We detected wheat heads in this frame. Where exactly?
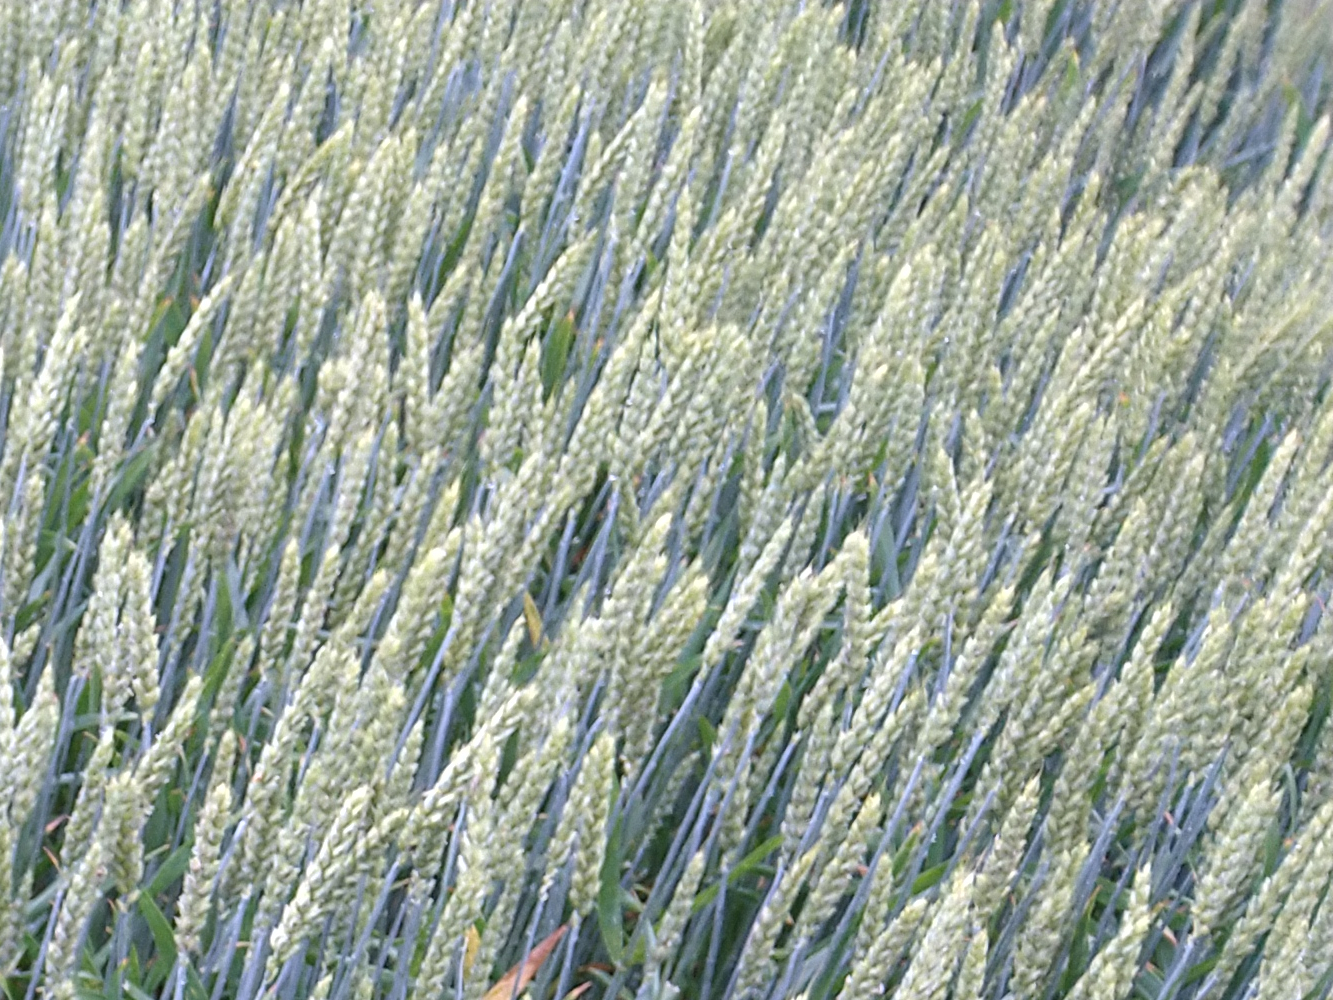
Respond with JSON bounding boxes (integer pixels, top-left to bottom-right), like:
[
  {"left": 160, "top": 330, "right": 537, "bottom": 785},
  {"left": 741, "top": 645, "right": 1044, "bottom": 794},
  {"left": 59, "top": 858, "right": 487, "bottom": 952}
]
[
  {"left": 334, "top": 0, "right": 354, "bottom": 89},
  {"left": 612, "top": 94, "right": 665, "bottom": 222},
  {"left": 1033, "top": 40, "right": 1075, "bottom": 103},
  {"left": 993, "top": 755, "right": 1020, "bottom": 831},
  {"left": 717, "top": 629, "right": 771, "bottom": 744},
  {"left": 191, "top": 415, "right": 224, "bottom": 528},
  {"left": 542, "top": 751, "right": 596, "bottom": 874},
  {"left": 971, "top": 56, "right": 1010, "bottom": 175},
  {"left": 854, "top": 134, "right": 900, "bottom": 218},
  {"left": 77, "top": 0, "right": 93, "bottom": 40},
  {"left": 61, "top": 733, "right": 113, "bottom": 865},
  {"left": 1310, "top": 261, "right": 1333, "bottom": 308},
  {"left": 397, "top": 699, "right": 527, "bottom": 848},
  {"left": 426, "top": 352, "right": 482, "bottom": 440},
  {"left": 705, "top": 522, "right": 793, "bottom": 660},
  {"left": 1007, "top": 157, "right": 1058, "bottom": 249},
  {"left": 879, "top": 743, "right": 923, "bottom": 826},
  {"left": 53, "top": 42, "right": 77, "bottom": 94},
  {"left": 738, "top": 462, "right": 786, "bottom": 568},
  {"left": 902, "top": 255, "right": 932, "bottom": 348},
  {"left": 1050, "top": 90, "right": 1078, "bottom": 156},
  {"left": 918, "top": 595, "right": 1015, "bottom": 745},
  {"left": 457, "top": 329, "right": 490, "bottom": 411},
  {"left": 880, "top": 150, "right": 950, "bottom": 244},
  {"left": 960, "top": 409, "right": 988, "bottom": 486},
  {"left": 35, "top": 90, "right": 70, "bottom": 205},
  {"left": 0, "top": 876, "right": 36, "bottom": 970},
  {"left": 513, "top": 249, "right": 579, "bottom": 336},
  {"left": 686, "top": 476, "right": 713, "bottom": 528},
  {"left": 1201, "top": 192, "right": 1260, "bottom": 254},
  {"left": 652, "top": 559, "right": 703, "bottom": 626},
  {"left": 251, "top": 827, "right": 307, "bottom": 945},
  {"left": 958, "top": 765, "right": 991, "bottom": 853},
  {"left": 1167, "top": 273, "right": 1223, "bottom": 407},
  {"left": 589, "top": 0, "right": 635, "bottom": 86},
  {"left": 260, "top": 543, "right": 300, "bottom": 668},
  {"left": 854, "top": 101, "right": 886, "bottom": 145},
  {"left": 637, "top": 556, "right": 668, "bottom": 617},
  {"left": 327, "top": 510, "right": 386, "bottom": 619},
  {"left": 848, "top": 241, "right": 877, "bottom": 340},
  {"left": 129, "top": 271, "right": 161, "bottom": 338},
  {"left": 870, "top": 106, "right": 903, "bottom": 156},
  {"left": 632, "top": 114, "right": 700, "bottom": 246},
  {"left": 884, "top": 40, "right": 900, "bottom": 88},
  {"left": 498, "top": 484, "right": 569, "bottom": 601},
  {"left": 1142, "top": 0, "right": 1163, "bottom": 53},
  {"left": 0, "top": 262, "right": 16, "bottom": 373},
  {"left": 1258, "top": 0, "right": 1314, "bottom": 101},
  {"left": 41, "top": 789, "right": 127, "bottom": 991},
  {"left": 745, "top": 577, "right": 810, "bottom": 698},
  {"left": 1007, "top": 266, "right": 1062, "bottom": 361},
  {"left": 1095, "top": 441, "right": 1166, "bottom": 534},
  {"left": 1041, "top": 920, "right": 1150, "bottom": 1000},
  {"left": 918, "top": 402, "right": 943, "bottom": 487},
  {"left": 592, "top": 234, "right": 629, "bottom": 339},
  {"left": 997, "top": 637, "right": 1088, "bottom": 750},
  {"left": 169, "top": 528, "right": 198, "bottom": 637},
  {"left": 676, "top": 420, "right": 713, "bottom": 492},
  {"left": 150, "top": 280, "right": 230, "bottom": 400},
  {"left": 104, "top": 100, "right": 123, "bottom": 184},
  {"left": 198, "top": 46, "right": 210, "bottom": 134},
  {"left": 1307, "top": 235, "right": 1331, "bottom": 274},
  {"left": 484, "top": 248, "right": 504, "bottom": 321},
  {"left": 882, "top": 371, "right": 925, "bottom": 490},
  {"left": 359, "top": 329, "right": 391, "bottom": 425},
  {"left": 695, "top": 38, "right": 745, "bottom": 134},
  {"left": 11, "top": 480, "right": 44, "bottom": 599},
  {"left": 905, "top": 762, "right": 940, "bottom": 816},
  {"left": 350, "top": 810, "right": 412, "bottom": 861},
  {"left": 937, "top": 213, "right": 955, "bottom": 241},
  {"left": 427, "top": 22, "right": 450, "bottom": 84},
  {"left": 1109, "top": 0, "right": 1153, "bottom": 83},
  {"left": 42, "top": 0, "right": 62, "bottom": 56},
  {"left": 1029, "top": 412, "right": 1090, "bottom": 514},
  {"left": 1283, "top": 344, "right": 1322, "bottom": 427},
  {"left": 1115, "top": 763, "right": 1151, "bottom": 821},
  {"left": 371, "top": 552, "right": 445, "bottom": 672},
  {"left": 1266, "top": 602, "right": 1306, "bottom": 655},
  {"left": 512, "top": 0, "right": 543, "bottom": 87},
  {"left": 1089, "top": 0, "right": 1133, "bottom": 69},
  {"left": 1153, "top": 176, "right": 1175, "bottom": 234},
  {"left": 523, "top": 90, "right": 579, "bottom": 215},
  {"left": 299, "top": 0, "right": 316, "bottom": 34},
  {"left": 381, "top": 723, "right": 425, "bottom": 817},
  {"left": 1123, "top": 310, "right": 1173, "bottom": 446},
  {"left": 32, "top": 330, "right": 87, "bottom": 475},
  {"left": 312, "top": 659, "right": 360, "bottom": 835},
  {"left": 160, "top": 0, "right": 171, "bottom": 63},
  {"left": 1199, "top": 707, "right": 1286, "bottom": 838},
  {"left": 113, "top": 778, "right": 140, "bottom": 882},
  {"left": 380, "top": 228, "right": 426, "bottom": 323},
  {"left": 935, "top": 149, "right": 966, "bottom": 200},
  {"left": 324, "top": 874, "right": 359, "bottom": 957},
  {"left": 219, "top": 259, "right": 263, "bottom": 363},
  {"left": 457, "top": 267, "right": 485, "bottom": 356},
  {"left": 1148, "top": 54, "right": 1189, "bottom": 152},
  {"left": 788, "top": 250, "right": 850, "bottom": 390},
  {"left": 843, "top": 52, "right": 858, "bottom": 93},
  {"left": 152, "top": 184, "right": 177, "bottom": 245},
  {"left": 787, "top": 8, "right": 842, "bottom": 119},
  {"left": 1185, "top": 673, "right": 1223, "bottom": 772},
  {"left": 927, "top": 271, "right": 983, "bottom": 406},
  {"left": 266, "top": 791, "right": 371, "bottom": 967},
  {"left": 426, "top": 268, "right": 467, "bottom": 336},
  {"left": 345, "top": 694, "right": 406, "bottom": 789},
  {"left": 857, "top": 145, "right": 910, "bottom": 233},
  {"left": 571, "top": 14, "right": 607, "bottom": 83},
  {"left": 991, "top": 237, "right": 1082, "bottom": 351},
  {"left": 781, "top": 706, "right": 835, "bottom": 858},
  {"left": 1216, "top": 84, "right": 1243, "bottom": 152},
  {"left": 922, "top": 487, "right": 992, "bottom": 629},
  {"left": 270, "top": 132, "right": 346, "bottom": 221},
  {"left": 115, "top": 0, "right": 149, "bottom": 95},
  {"left": 444, "top": 513, "right": 481, "bottom": 681},
  {"left": 569, "top": 740, "right": 615, "bottom": 910},
  {"left": 1139, "top": 462, "right": 1204, "bottom": 583},
  {"left": 950, "top": 0, "right": 977, "bottom": 107},
  {"left": 709, "top": 381, "right": 753, "bottom": 475},
  {"left": 1196, "top": 360, "right": 1227, "bottom": 443},
  {"left": 1269, "top": 112, "right": 1330, "bottom": 230},
  {"left": 479, "top": 326, "right": 514, "bottom": 459},
  {"left": 1094, "top": 0, "right": 1110, "bottom": 31},
  {"left": 478, "top": 67, "right": 500, "bottom": 132},
  {"left": 460, "top": 879, "right": 523, "bottom": 1000},
  {"left": 474, "top": 0, "right": 513, "bottom": 78},
  {"left": 1041, "top": 331, "right": 1084, "bottom": 410},
  {"left": 1236, "top": 105, "right": 1256, "bottom": 143},
  {"left": 91, "top": 0, "right": 119, "bottom": 71},
  {"left": 1084, "top": 510, "right": 1143, "bottom": 611},
  {"left": 421, "top": 484, "right": 460, "bottom": 557},
  {"left": 1191, "top": 187, "right": 1231, "bottom": 266},
  {"left": 439, "top": 117, "right": 471, "bottom": 209},
  {"left": 919, "top": 70, "right": 949, "bottom": 154},
  {"left": 0, "top": 637, "right": 15, "bottom": 751},
  {"left": 831, "top": 634, "right": 917, "bottom": 774},
  {"left": 1066, "top": 100, "right": 1095, "bottom": 167},
  {"left": 26, "top": 197, "right": 58, "bottom": 353},
  {"left": 911, "top": 59, "right": 941, "bottom": 119},
  {"left": 134, "top": 213, "right": 148, "bottom": 265},
  {"left": 1070, "top": 423, "right": 1118, "bottom": 547},
  {"left": 1151, "top": 86, "right": 1201, "bottom": 172},
  {"left": 950, "top": 233, "right": 995, "bottom": 328},
  {"left": 1023, "top": 101, "right": 1047, "bottom": 137},
  {"left": 1093, "top": 102, "right": 1127, "bottom": 174},
  {"left": 841, "top": 368, "right": 867, "bottom": 476},
  {"left": 885, "top": 58, "right": 905, "bottom": 95},
  {"left": 340, "top": 309, "right": 355, "bottom": 364},
  {"left": 1138, "top": 203, "right": 1198, "bottom": 296},
  {"left": 131, "top": 682, "right": 200, "bottom": 790},
  {"left": 302, "top": 364, "right": 345, "bottom": 455},
  {"left": 1172, "top": 504, "right": 1233, "bottom": 603},
  {"left": 177, "top": 786, "right": 232, "bottom": 950},
  {"left": 290, "top": 404, "right": 350, "bottom": 541},
  {"left": 828, "top": 89, "right": 858, "bottom": 138},
  {"left": 209, "top": 731, "right": 237, "bottom": 795},
  {"left": 405, "top": 297, "right": 430, "bottom": 443},
  {"left": 1021, "top": 0, "right": 1048, "bottom": 42},
  {"left": 1184, "top": 314, "right": 1243, "bottom": 429},
  {"left": 1205, "top": 436, "right": 1227, "bottom": 500},
  {"left": 647, "top": 754, "right": 698, "bottom": 835},
  {"left": 326, "top": 144, "right": 392, "bottom": 274},
  {"left": 1108, "top": 664, "right": 1153, "bottom": 797},
  {"left": 740, "top": 404, "right": 767, "bottom": 525},
  {"left": 1067, "top": 174, "right": 1101, "bottom": 235},
  {"left": 226, "top": 167, "right": 268, "bottom": 268},
  {"left": 1065, "top": 303, "right": 1145, "bottom": 402},
  {"left": 385, "top": 456, "right": 437, "bottom": 559},
  {"left": 340, "top": 405, "right": 363, "bottom": 482},
  {"left": 583, "top": 101, "right": 655, "bottom": 196},
  {"left": 443, "top": 143, "right": 482, "bottom": 238},
  {"left": 854, "top": 857, "right": 893, "bottom": 962},
  {"left": 1160, "top": 659, "right": 1188, "bottom": 708},
  {"left": 701, "top": 326, "right": 740, "bottom": 378},
  {"left": 948, "top": 255, "right": 1009, "bottom": 402},
  {"left": 81, "top": 76, "right": 118, "bottom": 172},
  {"left": 1004, "top": 534, "right": 1041, "bottom": 586},
  {"left": 37, "top": 879, "right": 96, "bottom": 1000},
  {"left": 900, "top": 137, "right": 934, "bottom": 203},
  {"left": 558, "top": 620, "right": 607, "bottom": 713},
  {"left": 216, "top": 0, "right": 250, "bottom": 80},
  {"left": 371, "top": 424, "right": 400, "bottom": 516},
  {"left": 216, "top": 0, "right": 229, "bottom": 46},
  {"left": 970, "top": 572, "right": 1049, "bottom": 733},
  {"left": 872, "top": 5, "right": 886, "bottom": 60},
  {"left": 912, "top": 7, "right": 926, "bottom": 64},
  {"left": 84, "top": 0, "right": 106, "bottom": 41},
  {"left": 289, "top": 51, "right": 310, "bottom": 109},
  {"left": 354, "top": 75, "right": 380, "bottom": 156},
  {"left": 930, "top": 0, "right": 949, "bottom": 56},
  {"left": 1178, "top": 5, "right": 1200, "bottom": 52},
  {"left": 66, "top": 0, "right": 83, "bottom": 42},
  {"left": 1110, "top": 607, "right": 1173, "bottom": 715},
  {"left": 765, "top": 290, "right": 815, "bottom": 371},
  {"left": 802, "top": 138, "right": 835, "bottom": 184},
  {"left": 1205, "top": 882, "right": 1325, "bottom": 1000},
  {"left": 985, "top": 363, "right": 999, "bottom": 414},
  {"left": 950, "top": 54, "right": 977, "bottom": 132},
  {"left": 223, "top": 742, "right": 279, "bottom": 902},
  {"left": 69, "top": 146, "right": 101, "bottom": 271},
  {"left": 18, "top": 85, "right": 51, "bottom": 201},
  {"left": 217, "top": 91, "right": 287, "bottom": 222},
  {"left": 247, "top": 59, "right": 279, "bottom": 138},
  {"left": 798, "top": 607, "right": 898, "bottom": 721},
  {"left": 486, "top": 736, "right": 566, "bottom": 867},
  {"left": 1052, "top": 419, "right": 1105, "bottom": 544},
  {"left": 387, "top": 185, "right": 424, "bottom": 290},
  {"left": 1112, "top": 877, "right": 1153, "bottom": 999},
  {"left": 256, "top": 10, "right": 286, "bottom": 73},
  {"left": 106, "top": 605, "right": 130, "bottom": 714},
  {"left": 996, "top": 313, "right": 1057, "bottom": 444},
  {"left": 668, "top": 340, "right": 747, "bottom": 455},
  {"left": 1251, "top": 971, "right": 1301, "bottom": 1000},
  {"left": 308, "top": 0, "right": 330, "bottom": 52},
  {"left": 144, "top": 62, "right": 164, "bottom": 156},
  {"left": 1253, "top": 689, "right": 1314, "bottom": 786},
  {"left": 647, "top": 854, "right": 706, "bottom": 971},
  {"left": 321, "top": 649, "right": 335, "bottom": 669},
  {"left": 735, "top": 851, "right": 815, "bottom": 990},
  {"left": 1014, "top": 207, "right": 1062, "bottom": 304},
  {"left": 345, "top": 674, "right": 390, "bottom": 765},
  {"left": 1285, "top": 416, "right": 1333, "bottom": 516},
  {"left": 97, "top": 528, "right": 122, "bottom": 680},
  {"left": 389, "top": 362, "right": 413, "bottom": 397},
  {"left": 1232, "top": 812, "right": 1331, "bottom": 956},
  {"left": 1168, "top": 492, "right": 1201, "bottom": 575},
  {"left": 873, "top": 0, "right": 908, "bottom": 62},
  {"left": 825, "top": 695, "right": 921, "bottom": 825},
  {"left": 974, "top": 97, "right": 1025, "bottom": 197},
  {"left": 740, "top": 4, "right": 764, "bottom": 78},
  {"left": 0, "top": 438, "right": 21, "bottom": 512},
  {"left": 1161, "top": 223, "right": 1195, "bottom": 285},
  {"left": 358, "top": 4, "right": 390, "bottom": 69},
  {"left": 614, "top": 339, "right": 656, "bottom": 472},
  {"left": 1228, "top": 601, "right": 1268, "bottom": 669},
  {"left": 973, "top": 777, "right": 1041, "bottom": 926},
  {"left": 685, "top": 2, "right": 704, "bottom": 104},
  {"left": 1147, "top": 451, "right": 1178, "bottom": 515},
  {"left": 620, "top": 681, "right": 662, "bottom": 773},
  {"left": 137, "top": 465, "right": 174, "bottom": 549},
  {"left": 892, "top": 59, "right": 918, "bottom": 97},
  {"left": 411, "top": 877, "right": 484, "bottom": 1000},
  {"left": 0, "top": 875, "right": 16, "bottom": 964},
  {"left": 963, "top": 167, "right": 1009, "bottom": 250},
  {"left": 851, "top": 355, "right": 909, "bottom": 466},
  {"left": 544, "top": 382, "right": 577, "bottom": 458},
  {"left": 1116, "top": 106, "right": 1150, "bottom": 176},
  {"left": 920, "top": 256, "right": 946, "bottom": 322},
  {"left": 254, "top": 225, "right": 296, "bottom": 355},
  {"left": 113, "top": 224, "right": 140, "bottom": 302},
  {"left": 416, "top": 150, "right": 446, "bottom": 232},
  {"left": 1238, "top": 258, "right": 1278, "bottom": 354},
  {"left": 387, "top": 534, "right": 460, "bottom": 664},
  {"left": 781, "top": 486, "right": 826, "bottom": 583},
  {"left": 131, "top": 560, "right": 160, "bottom": 712},
  {"left": 335, "top": 291, "right": 379, "bottom": 413},
  {"left": 566, "top": 349, "right": 626, "bottom": 484},
  {"left": 10, "top": 667, "right": 60, "bottom": 822},
  {"left": 335, "top": 52, "right": 358, "bottom": 126},
  {"left": 207, "top": 639, "right": 254, "bottom": 742},
  {"left": 802, "top": 166, "right": 885, "bottom": 282},
  {"left": 748, "top": 723, "right": 785, "bottom": 798},
  {"left": 985, "top": 134, "right": 1024, "bottom": 213},
  {"left": 1281, "top": 647, "right": 1311, "bottom": 688},
  {"left": 17, "top": 0, "right": 36, "bottom": 68},
  {"left": 287, "top": 232, "right": 306, "bottom": 306},
  {"left": 407, "top": 0, "right": 435, "bottom": 79},
  {"left": 169, "top": 416, "right": 206, "bottom": 532},
  {"left": 76, "top": 225, "right": 113, "bottom": 335},
  {"left": 566, "top": 137, "right": 602, "bottom": 240},
  {"left": 385, "top": 131, "right": 419, "bottom": 248},
  {"left": 176, "top": 66, "right": 202, "bottom": 177},
  {"left": 1123, "top": 304, "right": 1165, "bottom": 377},
  {"left": 653, "top": 6, "right": 682, "bottom": 77},
  {"left": 0, "top": 264, "right": 30, "bottom": 395},
  {"left": 460, "top": 744, "right": 499, "bottom": 899},
  {"left": 420, "top": 45, "right": 460, "bottom": 124},
  {"left": 690, "top": 211, "right": 737, "bottom": 303},
  {"left": 950, "top": 515, "right": 983, "bottom": 644},
  {"left": 811, "top": 51, "right": 842, "bottom": 128},
  {"left": 380, "top": 19, "right": 404, "bottom": 79},
  {"left": 1270, "top": 496, "right": 1332, "bottom": 601},
  {"left": 1223, "top": 433, "right": 1297, "bottom": 566},
  {"left": 1013, "top": 591, "right": 1057, "bottom": 711},
  {"left": 314, "top": 167, "right": 346, "bottom": 245},
  {"left": 1201, "top": 12, "right": 1244, "bottom": 122},
  {"left": 542, "top": 46, "right": 567, "bottom": 120},
  {"left": 247, "top": 458, "right": 290, "bottom": 575},
  {"left": 330, "top": 436, "right": 374, "bottom": 540},
  {"left": 1037, "top": 680, "right": 1102, "bottom": 753},
  {"left": 1016, "top": 398, "right": 1066, "bottom": 496},
  {"left": 797, "top": 798, "right": 882, "bottom": 936},
  {"left": 247, "top": 0, "right": 270, "bottom": 64},
  {"left": 913, "top": 936, "right": 961, "bottom": 1000},
  {"left": 429, "top": 6, "right": 473, "bottom": 89},
  {"left": 938, "top": 933, "right": 989, "bottom": 1000},
  {"left": 950, "top": 194, "right": 970, "bottom": 243},
  {"left": 644, "top": 340, "right": 693, "bottom": 423},
  {"left": 738, "top": 274, "right": 789, "bottom": 381},
  {"left": 1191, "top": 781, "right": 1267, "bottom": 932},
  {"left": 6, "top": 330, "right": 35, "bottom": 427},
  {"left": 749, "top": 634, "right": 813, "bottom": 723},
  {"left": 937, "top": 248, "right": 962, "bottom": 322},
  {"left": 1134, "top": 220, "right": 1166, "bottom": 258},
  {"left": 883, "top": 537, "right": 940, "bottom": 658},
  {"left": 384, "top": 39, "right": 401, "bottom": 120},
  {"left": 560, "top": 247, "right": 591, "bottom": 309},
  {"left": 0, "top": 626, "right": 42, "bottom": 713},
  {"left": 849, "top": 954, "right": 934, "bottom": 1000},
  {"left": 847, "top": 538, "right": 871, "bottom": 642},
  {"left": 67, "top": 190, "right": 106, "bottom": 289},
  {"left": 642, "top": 584, "right": 707, "bottom": 672},
  {"left": 25, "top": 300, "right": 81, "bottom": 448},
  {"left": 224, "top": 362, "right": 266, "bottom": 448},
  {"left": 937, "top": 56, "right": 959, "bottom": 109},
  {"left": 156, "top": 89, "right": 185, "bottom": 189},
  {"left": 598, "top": 522, "right": 669, "bottom": 648},
  {"left": 623, "top": 612, "right": 701, "bottom": 721},
  {"left": 921, "top": 186, "right": 948, "bottom": 230},
  {"left": 861, "top": 0, "right": 878, "bottom": 53},
  {"left": 636, "top": 5, "right": 666, "bottom": 62},
  {"left": 759, "top": 18, "right": 802, "bottom": 126},
  {"left": 779, "top": 111, "right": 808, "bottom": 185},
  {"left": 0, "top": 1, "right": 8, "bottom": 108},
  {"left": 157, "top": 180, "right": 210, "bottom": 273},
  {"left": 1047, "top": 682, "right": 1128, "bottom": 852},
  {"left": 635, "top": 337, "right": 715, "bottom": 459},
  {"left": 1089, "top": 219, "right": 1133, "bottom": 333},
  {"left": 691, "top": 130, "right": 715, "bottom": 224},
  {"left": 1287, "top": 212, "right": 1319, "bottom": 269},
  {"left": 168, "top": 0, "right": 192, "bottom": 79},
  {"left": 117, "top": 97, "right": 146, "bottom": 178},
  {"left": 613, "top": 293, "right": 661, "bottom": 424},
  {"left": 690, "top": 247, "right": 730, "bottom": 329},
  {"left": 1295, "top": 716, "right": 1333, "bottom": 832},
  {"left": 95, "top": 349, "right": 138, "bottom": 477},
  {"left": 291, "top": 549, "right": 340, "bottom": 674},
  {"left": 1127, "top": 629, "right": 1232, "bottom": 775},
  {"left": 196, "top": 87, "right": 235, "bottom": 172},
  {"left": 1266, "top": 104, "right": 1298, "bottom": 183},
  {"left": 1248, "top": 260, "right": 1317, "bottom": 355},
  {"left": 0, "top": 0, "right": 21, "bottom": 101},
  {"left": 279, "top": 628, "right": 356, "bottom": 742},
  {"left": 1202, "top": 673, "right": 1249, "bottom": 771},
  {"left": 922, "top": 875, "right": 976, "bottom": 1000},
  {"left": 1049, "top": 249, "right": 1092, "bottom": 341},
  {"left": 834, "top": 903, "right": 929, "bottom": 1000},
  {"left": 506, "top": 341, "right": 542, "bottom": 470},
  {"left": 192, "top": 14, "right": 212, "bottom": 70},
  {"left": 564, "top": 396, "right": 594, "bottom": 463},
  {"left": 762, "top": 189, "right": 796, "bottom": 274},
  {"left": 31, "top": 0, "right": 52, "bottom": 41},
  {"left": 300, "top": 204, "right": 325, "bottom": 372},
  {"left": 611, "top": 1, "right": 636, "bottom": 69},
  {"left": 983, "top": 461, "right": 1020, "bottom": 547},
  {"left": 773, "top": 460, "right": 804, "bottom": 534},
  {"left": 730, "top": 129, "right": 784, "bottom": 244},
  {"left": 660, "top": 191, "right": 694, "bottom": 342},
  {"left": 62, "top": 99, "right": 87, "bottom": 172},
  {"left": 1164, "top": 255, "right": 1228, "bottom": 361},
  {"left": 1309, "top": 155, "right": 1333, "bottom": 210},
  {"left": 1051, "top": 577, "right": 1072, "bottom": 613},
  {"left": 880, "top": 267, "right": 912, "bottom": 341},
  {"left": 989, "top": 21, "right": 1007, "bottom": 88},
  {"left": 1010, "top": 847, "right": 1087, "bottom": 999},
  {"left": 794, "top": 534, "right": 860, "bottom": 645},
  {"left": 1064, "top": 213, "right": 1105, "bottom": 289},
  {"left": 104, "top": 295, "right": 132, "bottom": 342},
  {"left": 1216, "top": 670, "right": 1277, "bottom": 781},
  {"left": 931, "top": 453, "right": 960, "bottom": 557},
  {"left": 1239, "top": 791, "right": 1284, "bottom": 877},
  {"left": 137, "top": 140, "right": 158, "bottom": 195},
  {"left": 531, "top": 0, "right": 562, "bottom": 69},
  {"left": 457, "top": 0, "right": 488, "bottom": 89},
  {"left": 408, "top": 797, "right": 455, "bottom": 921},
  {"left": 483, "top": 460, "right": 544, "bottom": 566},
  {"left": 735, "top": 258, "right": 760, "bottom": 320},
  {"left": 602, "top": 612, "right": 632, "bottom": 713},
  {"left": 230, "top": 37, "right": 259, "bottom": 151},
  {"left": 734, "top": 23, "right": 776, "bottom": 141},
  {"left": 793, "top": 170, "right": 848, "bottom": 246},
  {"left": 339, "top": 574, "right": 393, "bottom": 645},
  {"left": 477, "top": 618, "right": 526, "bottom": 724},
  {"left": 242, "top": 380, "right": 300, "bottom": 486},
  {"left": 1135, "top": 766, "right": 1175, "bottom": 833},
  {"left": 597, "top": 603, "right": 613, "bottom": 658},
  {"left": 1011, "top": 133, "right": 1038, "bottom": 179},
  {"left": 718, "top": 733, "right": 753, "bottom": 852},
  {"left": 467, "top": 100, "right": 527, "bottom": 251},
  {"left": 73, "top": 528, "right": 131, "bottom": 667},
  {"left": 0, "top": 746, "right": 14, "bottom": 869},
  {"left": 284, "top": 46, "right": 332, "bottom": 147}
]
